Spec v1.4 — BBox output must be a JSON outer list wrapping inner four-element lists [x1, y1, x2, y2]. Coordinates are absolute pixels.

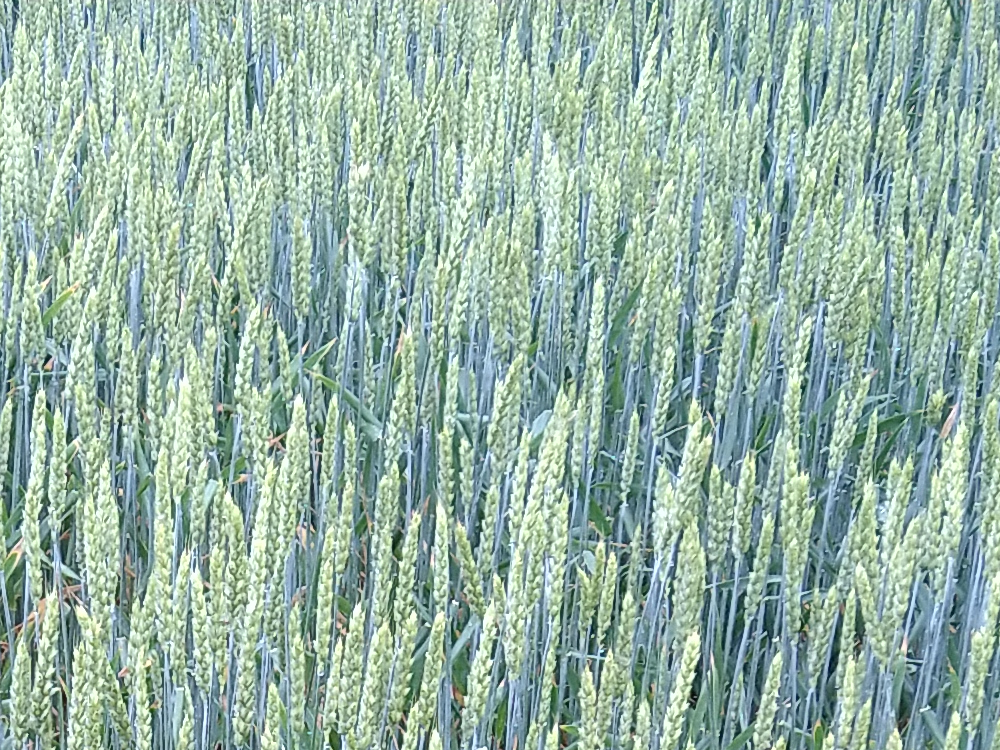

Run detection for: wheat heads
[[258, 308, 274, 385], [488, 67, 501, 147], [190, 0, 203, 49], [508, 22, 519, 107], [819, 106, 848, 200], [906, 10, 915, 66], [836, 132, 848, 188], [517, 79, 535, 157], [410, 159, 423, 229], [538, 0, 548, 27], [797, 24, 811, 72], [711, 106, 721, 161], [125, 597, 142, 665], [313, 364, 325, 420], [508, 164, 534, 251], [24, 156, 38, 222], [510, 65, 530, 138], [31, 592, 61, 729], [635, 218, 645, 281], [29, 387, 47, 453], [347, 78, 361, 128], [93, 230, 118, 313], [459, 435, 474, 518], [337, 483, 354, 572], [489, 576, 505, 636], [11, 638, 29, 738], [210, 37, 228, 78], [954, 215, 982, 312], [537, 270, 556, 353], [517, 723, 539, 750], [0, 402, 12, 488], [348, 242, 358, 313], [509, 432, 530, 541], [188, 175, 207, 285], [390, 616, 419, 720], [414, 81, 448, 148], [179, 254, 205, 330], [612, 178, 622, 237], [148, 119, 166, 202], [670, 524, 702, 608], [458, 0, 473, 63], [919, 89, 934, 143], [178, 76, 197, 124], [781, 539, 803, 635], [75, 608, 135, 742], [585, 42, 604, 120], [446, 0, 462, 60], [235, 308, 259, 400], [750, 106, 762, 156], [851, 162, 865, 218], [754, 654, 783, 750], [297, 51, 310, 117], [881, 111, 903, 154], [219, 227, 243, 322], [96, 29, 106, 75], [447, 185, 476, 269], [959, 110, 971, 209], [362, 193, 389, 260], [808, 588, 838, 681], [310, 117, 321, 197], [248, 547, 273, 620], [923, 0, 942, 54], [166, 345, 180, 402], [294, 121, 313, 220], [714, 483, 737, 559], [119, 165, 144, 252], [645, 76, 659, 129], [332, 321, 356, 396], [464, 50, 486, 189], [868, 0, 877, 47], [846, 41, 865, 98], [164, 379, 177, 443], [137, 195, 158, 277], [155, 187, 172, 261], [261, 93, 276, 162], [0, 0, 7, 29], [21, 54, 40, 133], [204, 0, 215, 46], [881, 462, 915, 552], [929, 11, 952, 80], [109, 11, 120, 34], [239, 404, 252, 459], [854, 568, 883, 656], [847, 702, 873, 750], [22, 298, 27, 368], [528, 81, 536, 150], [631, 259, 660, 362], [380, 0, 399, 49], [60, 0, 73, 54], [29, 518, 43, 597], [112, 114, 127, 214], [576, 295, 590, 355], [444, 353, 459, 430], [733, 214, 755, 326], [837, 517, 857, 589], [734, 455, 755, 554], [948, 38, 965, 101], [367, 93, 374, 142], [686, 18, 708, 94], [599, 554, 618, 641], [399, 69, 415, 127], [27, 288, 45, 357], [807, 28, 823, 83], [487, 223, 509, 353], [264, 547, 289, 641], [422, 348, 439, 423], [163, 282, 177, 343], [492, 30, 503, 84], [960, 294, 980, 349], [288, 629, 304, 736], [934, 713, 961, 750], [317, 562, 332, 662], [244, 176, 269, 228], [260, 0, 274, 72], [344, 0, 359, 43], [40, 106, 53, 179], [0, 247, 4, 334], [929, 223, 945, 276], [703, 0, 717, 25], [289, 228, 301, 321], [503, 385, 521, 463], [684, 39, 709, 132], [865, 199, 875, 250], [942, 237, 964, 326], [911, 297, 939, 380], [537, 81, 552, 171], [584, 127, 597, 193], [85, 438, 100, 492], [946, 105, 953, 153], [756, 214, 770, 301], [535, 146, 552, 207], [44, 117, 86, 224], [20, 23, 28, 81], [133, 169, 152, 264], [194, 360, 219, 445], [87, 98, 106, 195], [989, 40, 998, 79], [6, 85, 13, 147], [936, 154, 955, 207], [984, 234, 999, 323], [824, 191, 846, 267], [76, 499, 86, 572], [806, 590, 823, 673], [640, 1, 657, 60], [14, 121, 23, 227], [584, 164, 601, 258], [348, 162, 366, 244], [438, 430, 454, 510], [586, 370, 605, 468], [133, 110, 139, 141], [612, 0, 632, 30], [633, 0, 643, 49], [523, 515, 549, 602], [985, 709, 1000, 750], [30, 0, 39, 40], [16, 453, 42, 534], [893, 128, 909, 176], [303, 7, 316, 61], [736, 51, 759, 102], [510, 238, 528, 356], [318, 128, 332, 205], [657, 56, 672, 132], [980, 429, 1000, 540], [388, 462, 398, 531], [653, 471, 674, 558], [0, 25, 5, 66], [75, 74, 84, 115], [395, 515, 421, 626], [615, 593, 639, 694], [65, 38, 86, 92], [850, 305, 870, 394], [123, 23, 139, 111], [729, 0, 744, 34], [95, 457, 109, 557], [546, 495, 571, 625], [926, 145, 942, 208], [441, 7, 450, 56], [406, 0, 420, 32], [98, 498, 120, 610], [685, 400, 698, 431], [97, 127, 114, 169], [135, 656, 152, 750], [660, 634, 702, 750], [668, 217, 680, 279], [66, 237, 83, 332], [579, 665, 595, 737], [514, 157, 524, 205], [854, 412, 878, 501], [254, 104, 265, 175], [473, 149, 489, 221], [58, 258, 66, 346], [214, 0, 234, 25], [82, 344, 105, 443], [435, 150, 444, 206], [395, 708, 421, 750], [783, 18, 804, 118], [361, 627, 388, 742], [672, 28, 687, 93], [87, 685, 108, 750], [575, 0, 579, 18], [183, 20, 191, 75], [376, 380, 414, 455], [841, 0, 853, 51], [762, 19, 771, 48], [213, 127, 224, 175], [745, 514, 775, 616], [106, 40, 114, 125], [371, 475, 392, 565], [390, 178, 408, 269], [521, 0, 533, 37], [478, 604, 498, 658], [322, 396, 339, 483], [217, 73, 227, 153], [531, 15, 539, 69], [393, 35, 411, 82], [503, 130, 513, 216], [735, 100, 749, 194], [268, 684, 282, 750], [828, 2, 838, 61], [122, 325, 137, 453], [108, 286, 119, 365], [7, 266, 25, 343], [726, 133, 740, 191], [976, 40, 988, 85], [277, 70, 294, 147], [622, 33, 631, 117], [597, 653, 615, 745], [191, 365, 201, 475], [537, 77, 553, 127], [746, 140, 765, 206], [419, 614, 445, 725], [880, 16, 892, 84], [805, 89, 836, 170], [146, 62, 166, 119], [319, 486, 334, 544], [139, 41, 155, 90], [227, 84, 239, 169], [879, 518, 924, 653], [26, 253, 39, 289], [982, 401, 999, 506], [749, 311, 773, 392], [141, 0, 159, 38], [713, 124, 732, 193], [423, 46, 436, 111], [817, 0, 824, 17], [885, 461, 901, 508], [330, 87, 347, 162], [321, 643, 343, 729], [249, 467, 280, 556], [817, 155, 837, 206], [851, 196, 864, 262], [542, 164, 563, 261], [216, 77, 228, 116], [633, 35, 662, 129], [579, 0, 596, 35], [4, 0, 15, 41], [772, 73, 786, 134], [603, 87, 615, 158], [571, 90, 584, 147], [365, 324, 377, 413], [492, 106, 508, 204], [539, 396, 568, 454], [462, 73, 476, 185], [788, 475, 813, 534], [441, 144, 461, 216], [845, 75, 864, 165], [205, 487, 227, 607], [152, 448, 170, 542], [784, 117, 801, 190], [67, 643, 92, 750], [696, 242, 722, 348], [148, 358, 158, 450], [837, 590, 857, 696], [78, 200, 114, 284], [297, 0, 308, 51], [374, 528, 394, 638], [915, 225, 923, 305], [89, 0, 103, 41], [194, 90, 200, 142], [970, 0, 981, 49], [50, 407, 67, 518], [169, 694, 196, 750], [705, 39, 723, 127], [66, 293, 103, 394], [547, 0, 558, 26], [271, 65, 282, 96], [748, 0, 759, 48], [455, 526, 485, 613], [552, 93, 563, 138], [468, 374, 475, 437], [836, 280, 861, 355], [239, 164, 252, 214], [378, 0, 390, 55], [540, 26, 551, 72], [562, 281, 575, 345], [681, 551, 705, 645], [152, 529, 170, 638], [619, 680, 634, 742], [115, 255, 130, 315], [908, 176, 920, 245], [600, 181, 615, 267], [988, 488, 1000, 570], [246, 220, 259, 296], [74, 352, 82, 431], [924, 474, 943, 562], [937, 426, 972, 593], [112, 365, 123, 420], [652, 284, 681, 375], [535, 618, 558, 726], [669, 53, 690, 124], [632, 121, 648, 164], [162, 0, 179, 31], [420, 0, 440, 43], [838, 380, 871, 462], [892, 9, 905, 46], [891, 159, 910, 232], [623, 116, 630, 200], [424, 200, 439, 253], [311, 5, 327, 87], [697, 198, 714, 282], [278, 426, 302, 549], [295, 232, 313, 313], [199, 56, 204, 93], [488, 360, 521, 448], [214, 175, 230, 244], [179, 123, 211, 208], [685, 0, 698, 51], [521, 200, 531, 273], [862, 479, 879, 578], [783, 319, 813, 424], [670, 0, 685, 41], [988, 345, 1000, 403], [640, 700, 650, 750], [668, 148, 697, 266], [828, 389, 846, 485], [206, 84, 216, 118], [10, 28, 21, 93], [707, 469, 724, 564], [995, 72, 1000, 145], [453, 66, 468, 139], [505, 541, 523, 679], [283, 602, 303, 644], [191, 575, 210, 688], [824, 244, 852, 350], [568, 406, 588, 483], [526, 363, 535, 400], [134, 579, 155, 656], [258, 215, 271, 285], [610, 232, 633, 323], [859, 125, 872, 166], [58, 98, 72, 162], [760, 82, 768, 124], [111, 63, 124, 115], [381, 277, 399, 344], [505, 1, 520, 27], [283, 145, 291, 230], [201, 331, 217, 398], [395, 128, 409, 178], [202, 263, 213, 313], [226, 504, 247, 613], [964, 634, 990, 726], [910, 263, 930, 346], [252, 0, 261, 59], [606, 33, 622, 122], [254, 385, 271, 482], [964, 344, 981, 433], [772, 0, 791, 56], [409, 254, 431, 336], [648, 181, 673, 255], [202, 92, 209, 129], [671, 441, 713, 530], [660, 122, 682, 194], [45, 29, 51, 104], [349, 119, 359, 153], [170, 554, 192, 670], [432, 504, 449, 611], [858, 0, 865, 41], [776, 168, 815, 293], [872, 9, 889, 83], [138, 117, 152, 177], [206, 609, 225, 686], [431, 263, 445, 358], [341, 608, 366, 734], [590, 544, 606, 600], [558, 50, 580, 145], [50, 249, 58, 286], [264, 459, 290, 570], [258, 68, 271, 103], [130, 0, 141, 29], [71, 0, 85, 29], [323, 17, 335, 84], [761, 434, 789, 520], [772, 116, 786, 200], [183, 342, 199, 383], [276, 450, 279, 454], [984, 0, 995, 38], [678, 420, 706, 483], [35, 10, 46, 62], [486, 2, 498, 55], [633, 192, 643, 223], [105, 150, 121, 202], [898, 30, 906, 69], [228, 32, 245, 78], [169, 138, 178, 206], [359, 0, 374, 84], [725, 673, 744, 735], [583, 366, 592, 416], [344, 420, 351, 486], [886, 225, 902, 328], [476, 223, 494, 305], [928, 113, 937, 148], [239, 73, 246, 150], [164, 35, 185, 115], [278, 329, 291, 399], [95, 78, 105, 123], [926, 321, 947, 391], [290, 402, 313, 524], [374, 78, 399, 157], [593, 5, 611, 38], [586, 276, 606, 380], [178, 0, 191, 34], [402, 336, 416, 429], [652, 350, 677, 435], [233, 624, 258, 741], [464, 656, 495, 731], [558, 63, 570, 111], [520, 441, 553, 544], [978, 81, 995, 139], [629, 526, 643, 594], [277, 0, 290, 61], [0, 132, 14, 245], [814, 222, 831, 292], [714, 321, 737, 414], [450, 243, 478, 336], [986, 147, 1000, 225], [882, 538, 900, 653], [621, 412, 639, 497], [154, 224, 183, 315], [427, 148, 432, 225], [780, 445, 800, 541], [564, 0, 573, 20], [798, 512, 818, 570], [982, 576, 1000, 658], [84, 503, 100, 614], [724, 77, 737, 111], [40, 0, 51, 25], [867, 262, 885, 320], [827, 34, 845, 92], [554, 410, 568, 496], [192, 458, 208, 543], [472, 0, 485, 49], [834, 663, 859, 747], [798, 228, 811, 304], [100, 406, 108, 445], [575, 572, 592, 627], [877, 75, 903, 151], [439, 217, 451, 263], [50, 5, 65, 55], [480, 484, 498, 585], [174, 384, 191, 493], [230, 171, 241, 223], [332, 0, 343, 67], [564, 172, 579, 251]]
